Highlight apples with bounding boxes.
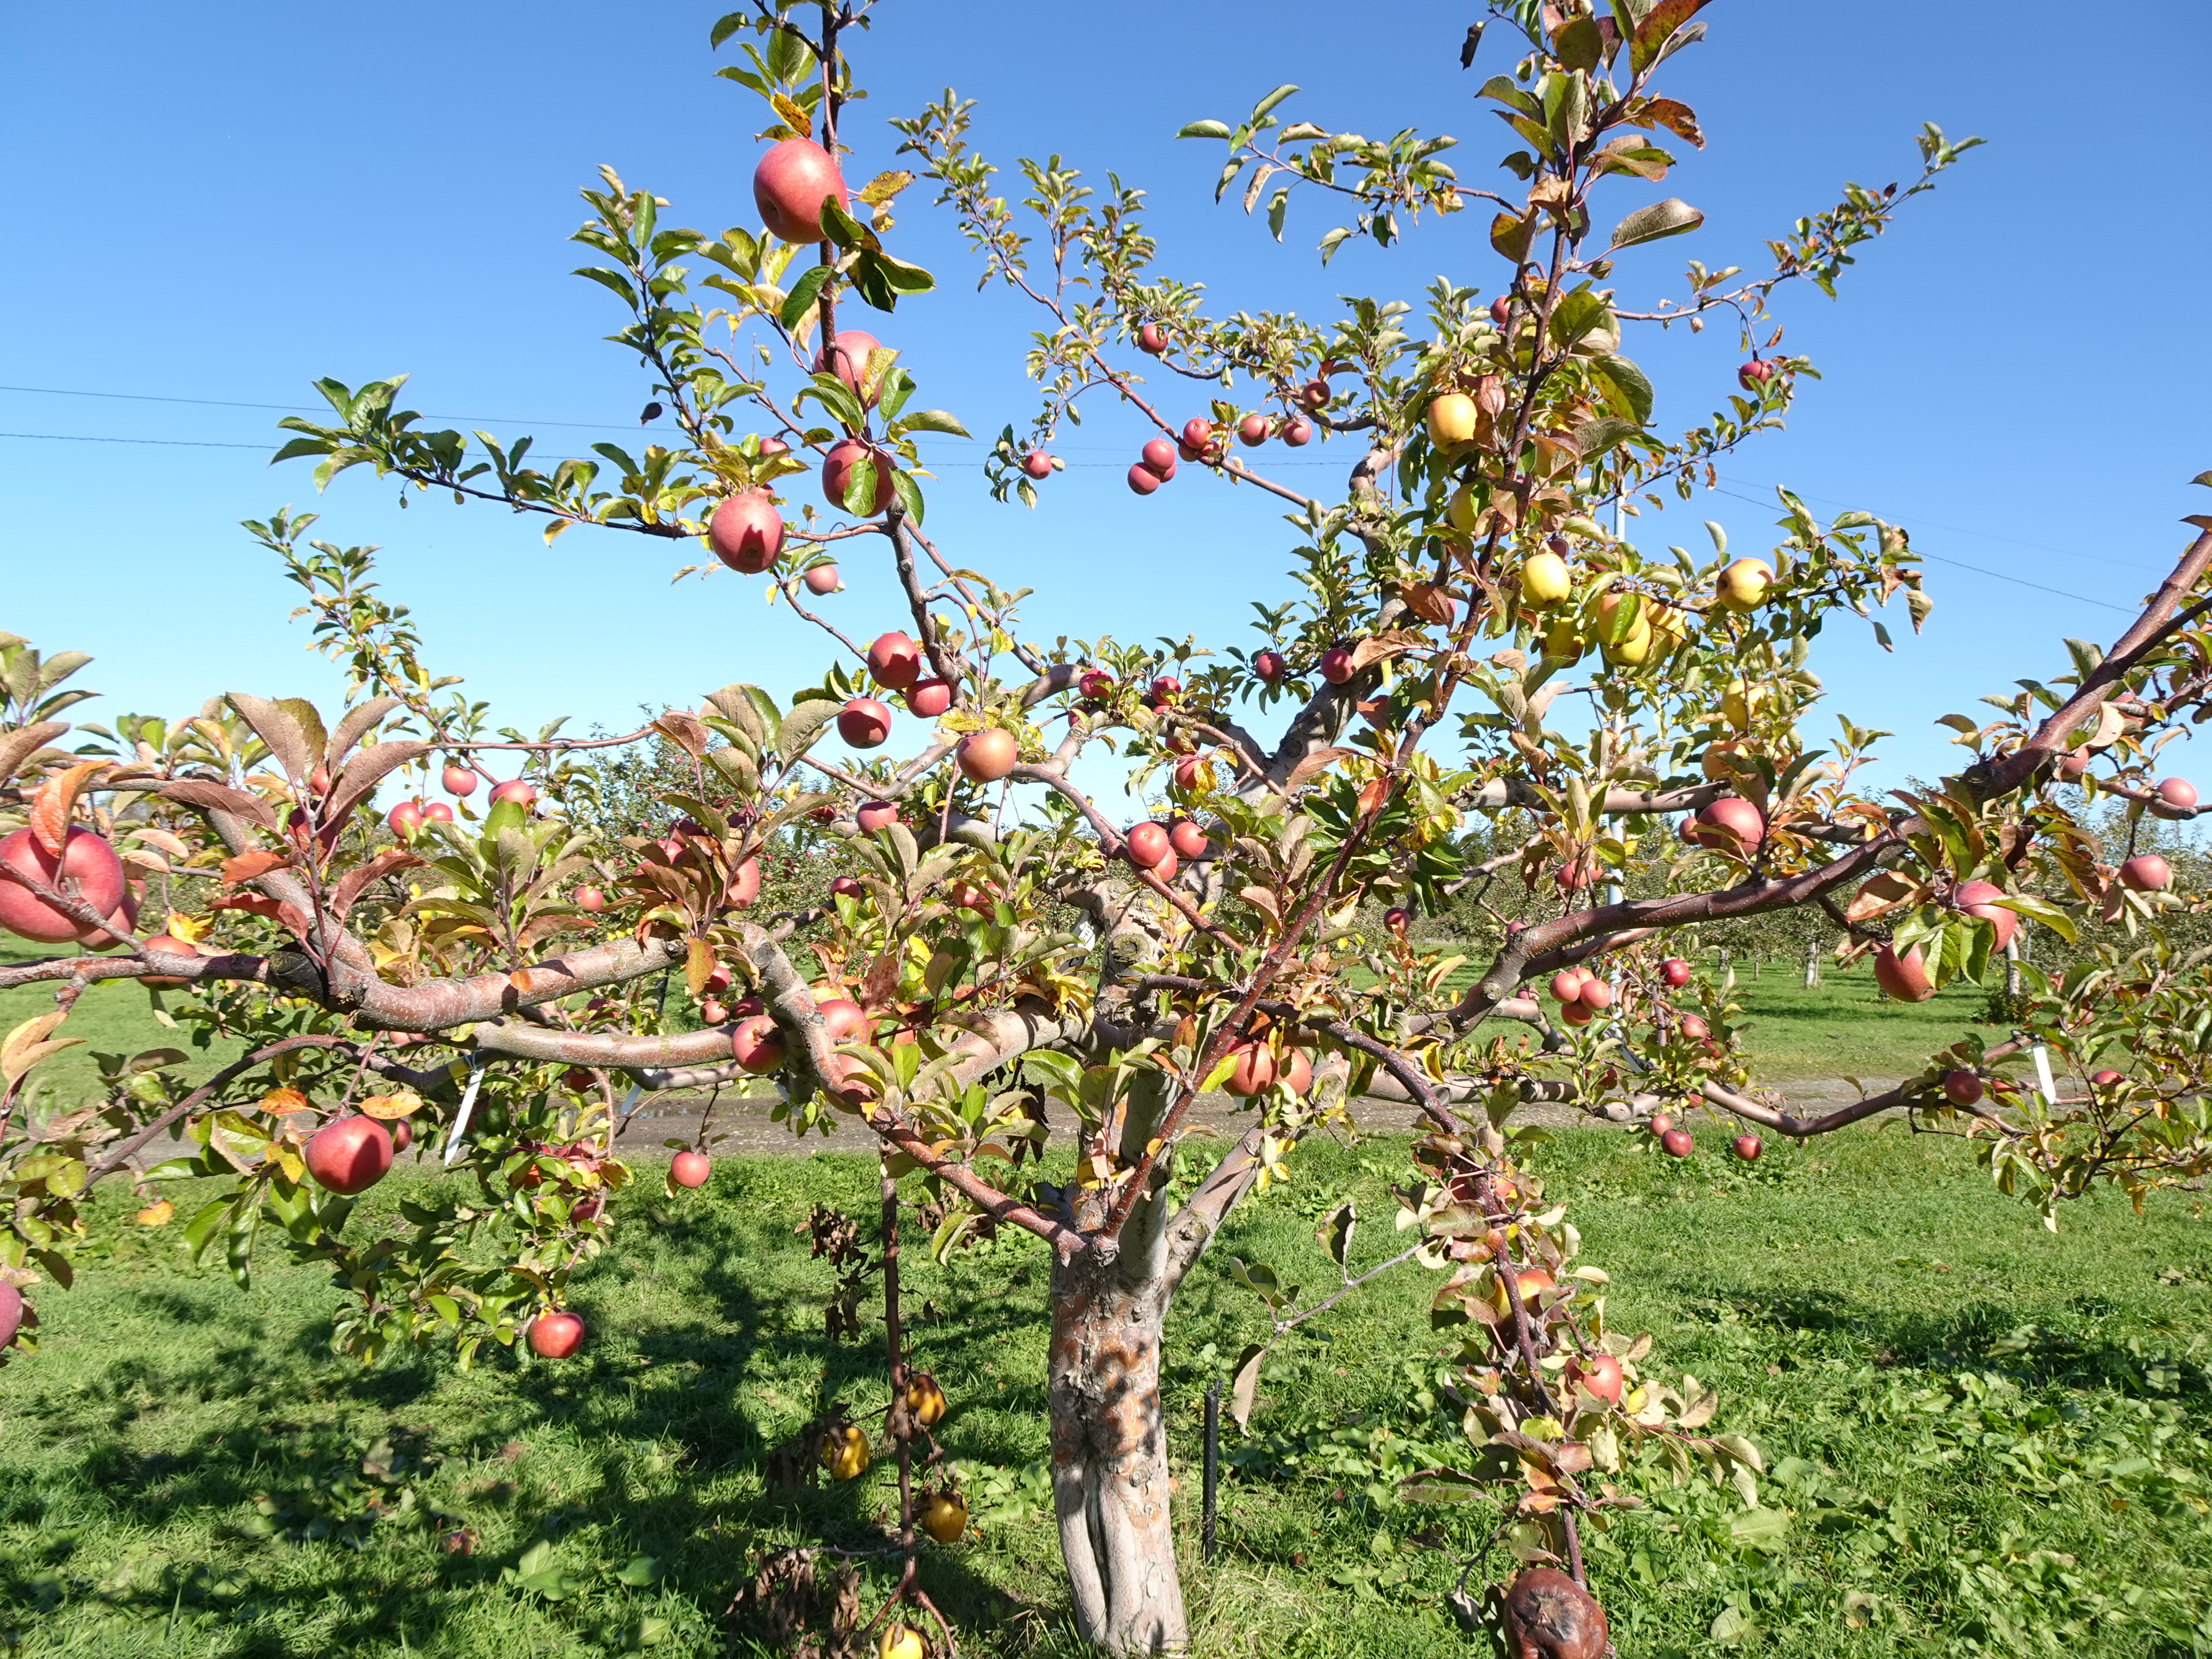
[738,808,755,826]
[837,698,891,749]
[1679,817,1700,845]
[1158,461,1176,482]
[1127,462,1160,495]
[1148,844,1178,882]
[1874,943,1935,1003]
[2147,777,2197,820]
[675,896,684,906]
[1722,680,1771,730]
[488,780,535,809]
[1546,538,1569,560]
[962,888,979,907]
[1702,1034,1727,1060]
[1564,1355,1623,1406]
[1142,439,1175,472]
[1,825,126,943]
[1567,967,1595,986]
[1079,669,1114,700]
[1738,360,1771,391]
[700,1000,727,1026]
[1597,1067,1617,1090]
[1024,451,1051,479]
[1175,754,1204,790]
[975,881,1012,920]
[703,966,730,994]
[455,1104,488,1132]
[1991,1080,2019,1107]
[668,819,694,847]
[1955,880,2016,955]
[587,998,618,1020]
[1717,557,1776,613]
[822,439,898,518]
[2110,694,2145,728]
[1596,593,1646,645]
[1733,1136,1761,1161]
[1165,737,1199,756]
[1572,1069,1592,1080]
[1585,560,1609,574]
[1199,441,1221,456]
[442,766,477,797]
[1139,323,1168,354]
[655,840,683,865]
[1516,986,1540,1000]
[1557,859,1587,890]
[1178,441,1200,461]
[389,1031,430,1044]
[393,1118,412,1154]
[1685,1093,1703,1108]
[75,894,137,952]
[1697,798,1764,860]
[1267,943,1296,958]
[734,997,764,1019]
[305,1114,394,1196]
[1265,1046,1312,1099]
[1580,979,1611,1010]
[1446,1158,1516,1200]
[815,999,869,1044]
[1520,553,1571,611]
[633,861,657,895]
[814,330,884,410]
[907,1374,946,1425]
[1320,648,1353,684]
[727,857,760,910]
[867,1007,914,1056]
[1659,960,1689,990]
[824,1426,869,1480]
[709,494,784,574]
[753,138,848,244]
[553,1141,603,1192]
[1238,415,1269,446]
[1127,822,1168,867]
[1549,973,1581,1003]
[1678,1015,1707,1046]
[1282,419,1311,447]
[570,1195,602,1228]
[1483,1269,1555,1348]
[1507,922,1528,934]
[565,1068,595,1094]
[760,437,789,458]
[830,876,861,903]
[805,564,837,596]
[0,1280,23,1353]
[1302,380,1330,409]
[868,632,920,690]
[1183,418,1212,449]
[923,1489,968,1543]
[1169,806,1194,829]
[1660,1129,1692,1158]
[424,803,453,821]
[1426,393,1478,455]
[2059,744,2089,779]
[126,879,147,909]
[1561,996,1592,1027]
[1068,705,1088,727]
[1540,617,1585,668]
[1645,602,1688,651]
[857,800,897,838]
[905,678,950,718]
[309,766,332,796]
[1152,705,1179,715]
[2091,1070,2125,1087]
[135,935,197,991]
[2120,855,2167,892]
[907,817,913,825]
[1602,619,1651,667]
[1170,822,1207,859]
[503,1143,552,1190]
[1496,322,1521,337]
[574,886,604,913]
[528,1309,584,1359]
[808,805,836,824]
[732,1015,784,1075]
[1255,652,1284,683]
[819,1047,887,1114]
[890,801,910,825]
[1490,295,1511,323]
[750,483,775,500]
[1701,740,1749,782]
[879,1622,923,1659]
[1500,519,1513,536]
[388,802,423,838]
[1221,1036,1280,1097]
[1945,1071,1983,1106]
[1151,676,1181,705]
[1503,1567,1607,1659]
[1383,908,1411,934]
[1649,1115,1671,1137]
[1589,865,1601,882]
[671,1151,709,1188]
[1439,384,1461,394]
[1086,849,1109,872]
[956,727,1017,784]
